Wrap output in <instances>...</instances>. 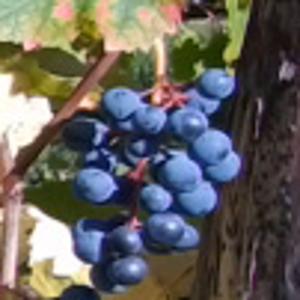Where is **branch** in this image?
<instances>
[{
  "label": "branch",
  "mask_w": 300,
  "mask_h": 300,
  "mask_svg": "<svg viewBox=\"0 0 300 300\" xmlns=\"http://www.w3.org/2000/svg\"><path fill=\"white\" fill-rule=\"evenodd\" d=\"M119 55L114 50L107 51L76 84L72 96L56 110L42 126L26 152L0 182V198L6 199L22 183L26 174L40 160L49 143L70 119L84 106L90 91L114 68Z\"/></svg>",
  "instance_id": "30e6481e"
}]
</instances>
